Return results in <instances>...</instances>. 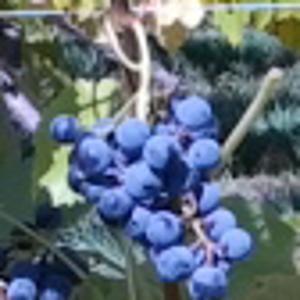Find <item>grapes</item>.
<instances>
[{
    "instance_id": "obj_1",
    "label": "grapes",
    "mask_w": 300,
    "mask_h": 300,
    "mask_svg": "<svg viewBox=\"0 0 300 300\" xmlns=\"http://www.w3.org/2000/svg\"><path fill=\"white\" fill-rule=\"evenodd\" d=\"M221 122L199 95L175 94L166 117L153 126L140 117L81 119L57 112L49 139L73 145L65 157L64 183L105 224H122L128 237L149 246L148 262L166 283L185 280L189 300H220L231 261L246 258L254 235L238 228V215L208 185L222 163Z\"/></svg>"
},
{
    "instance_id": "obj_2",
    "label": "grapes",
    "mask_w": 300,
    "mask_h": 300,
    "mask_svg": "<svg viewBox=\"0 0 300 300\" xmlns=\"http://www.w3.org/2000/svg\"><path fill=\"white\" fill-rule=\"evenodd\" d=\"M7 300H68L73 292V273L64 264L49 261L15 262L9 271Z\"/></svg>"
}]
</instances>
